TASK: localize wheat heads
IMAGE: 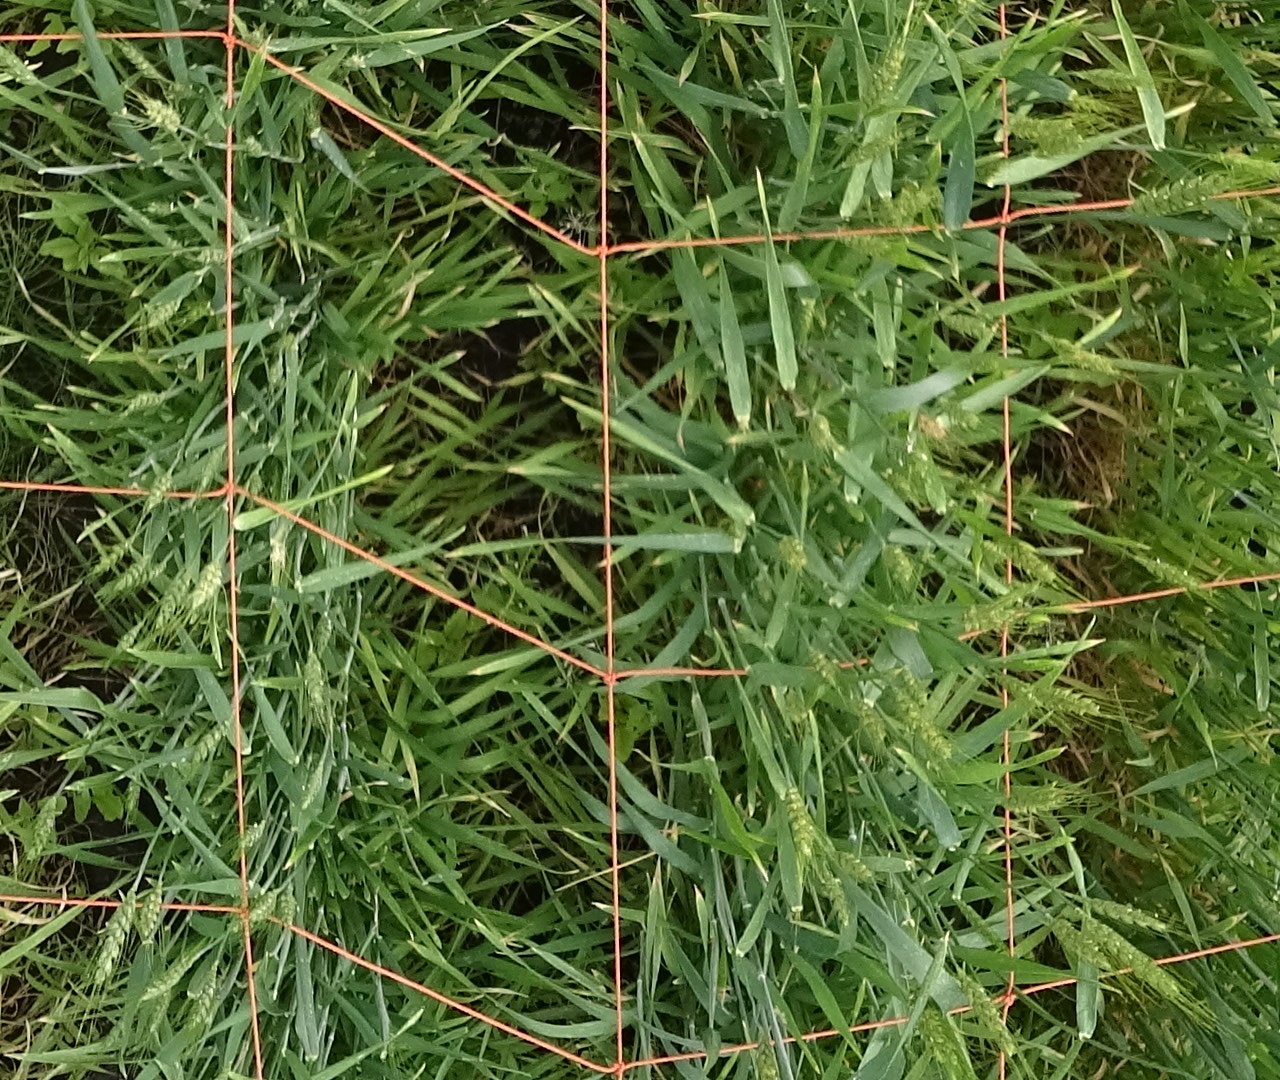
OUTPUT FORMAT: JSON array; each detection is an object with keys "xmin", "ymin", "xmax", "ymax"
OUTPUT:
[
  {"xmin": 820, "ymin": 877, "xmax": 848, "ymax": 920},
  {"xmin": 142, "ymin": 879, "xmax": 165, "ymax": 938},
  {"xmin": 246, "ymin": 133, "xmax": 265, "ymax": 160},
  {"xmin": 160, "ymin": 564, "xmax": 192, "ymax": 626},
  {"xmin": 1027, "ymin": 908, "xmax": 1105, "ymax": 969},
  {"xmin": 300, "ymin": 648, "xmax": 326, "ymax": 703},
  {"xmin": 857, "ymin": 703, "xmax": 882, "ymax": 741},
  {"xmin": 193, "ymin": 557, "xmax": 222, "ymax": 611},
  {"xmin": 111, "ymin": 624, "xmax": 137, "ymax": 653},
  {"xmin": 96, "ymin": 889, "xmax": 133, "ymax": 976},
  {"xmin": 998, "ymin": 665, "xmax": 1106, "ymax": 722},
  {"xmin": 140, "ymin": 946, "xmax": 195, "ymax": 1003},
  {"xmin": 191, "ymin": 250, "xmax": 230, "ymax": 264},
  {"xmin": 913, "ymin": 1008, "xmax": 965, "ymax": 1066},
  {"xmin": 1129, "ymin": 181, "xmax": 1235, "ymax": 224},
  {"xmin": 782, "ymin": 781, "xmax": 816, "ymax": 850},
  {"xmin": 148, "ymin": 296, "xmax": 185, "ymax": 326},
  {"xmin": 147, "ymin": 464, "xmax": 171, "ymax": 512},
  {"xmin": 1078, "ymin": 348, "xmax": 1118, "ymax": 373},
  {"xmin": 751, "ymin": 1024, "xmax": 781, "ymax": 1080},
  {"xmin": 835, "ymin": 846, "xmax": 871, "ymax": 877},
  {"xmin": 1206, "ymin": 153, "xmax": 1280, "ymax": 182},
  {"xmin": 318, "ymin": 607, "xmax": 335, "ymax": 653},
  {"xmin": 89, "ymin": 547, "xmax": 126, "ymax": 579},
  {"xmin": 1070, "ymin": 90, "xmax": 1114, "ymax": 116},
  {"xmin": 123, "ymin": 44, "xmax": 158, "ymax": 82},
  {"xmin": 974, "ymin": 537, "xmax": 1062, "ymax": 578},
  {"xmin": 883, "ymin": 678, "xmax": 957, "ymax": 759},
  {"xmin": 1082, "ymin": 890, "xmax": 1173, "ymax": 931},
  {"xmin": 144, "ymin": 197, "xmax": 176, "ymax": 214},
  {"xmin": 795, "ymin": 303, "xmax": 815, "ymax": 337},
  {"xmin": 1000, "ymin": 780, "xmax": 1077, "ymax": 812},
  {"xmin": 1076, "ymin": 914, "xmax": 1185, "ymax": 991},
  {"xmin": 0, "ymin": 52, "xmax": 39, "ymax": 88},
  {"xmin": 936, "ymin": 402, "xmax": 977, "ymax": 433},
  {"xmin": 841, "ymin": 126, "xmax": 899, "ymax": 167},
  {"xmin": 948, "ymin": 600, "xmax": 1033, "ymax": 631},
  {"xmin": 236, "ymin": 818, "xmax": 265, "ymax": 848},
  {"xmin": 957, "ymin": 971, "xmax": 1005, "ymax": 1033},
  {"xmin": 1136, "ymin": 552, "xmax": 1212, "ymax": 602},
  {"xmin": 881, "ymin": 544, "xmax": 913, "ymax": 585},
  {"xmin": 277, "ymin": 893, "xmax": 296, "ymax": 921},
  {"xmin": 185, "ymin": 967, "xmax": 220, "ymax": 1026},
  {"xmin": 946, "ymin": 308, "xmax": 990, "ymax": 336},
  {"xmin": 146, "ymin": 994, "xmax": 166, "ymax": 1033},
  {"xmin": 785, "ymin": 690, "xmax": 813, "ymax": 726},
  {"xmin": 146, "ymin": 101, "xmax": 176, "ymax": 127},
  {"xmin": 857, "ymin": 41, "xmax": 907, "ymax": 114},
  {"xmin": 1003, "ymin": 117, "xmax": 1072, "ymax": 146},
  {"xmin": 249, "ymin": 892, "xmax": 281, "ymax": 921},
  {"xmin": 117, "ymin": 560, "xmax": 153, "ymax": 591},
  {"xmin": 26, "ymin": 795, "xmax": 61, "ymax": 854},
  {"xmin": 953, "ymin": 892, "xmax": 1005, "ymax": 951},
  {"xmin": 126, "ymin": 777, "xmax": 143, "ymax": 807},
  {"xmin": 811, "ymin": 650, "xmax": 840, "ymax": 684},
  {"xmin": 833, "ymin": 229, "xmax": 894, "ymax": 258},
  {"xmin": 785, "ymin": 537, "xmax": 809, "ymax": 570},
  {"xmin": 131, "ymin": 389, "xmax": 165, "ymax": 414},
  {"xmin": 246, "ymin": 476, "xmax": 268, "ymax": 501},
  {"xmin": 1070, "ymin": 65, "xmax": 1159, "ymax": 91},
  {"xmin": 191, "ymin": 720, "xmax": 228, "ymax": 761}
]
